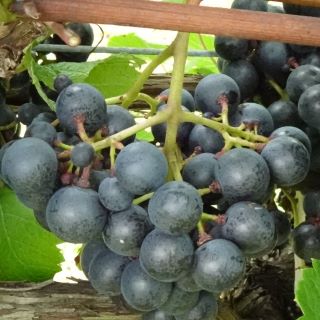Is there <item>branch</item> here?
Segmentation results:
<instances>
[{"mask_svg":"<svg viewBox=\"0 0 320 320\" xmlns=\"http://www.w3.org/2000/svg\"><path fill=\"white\" fill-rule=\"evenodd\" d=\"M39 20L136 26L320 47V17L150 0H32Z\"/></svg>","mask_w":320,"mask_h":320,"instance_id":"30e6481e","label":"branch"}]
</instances>
